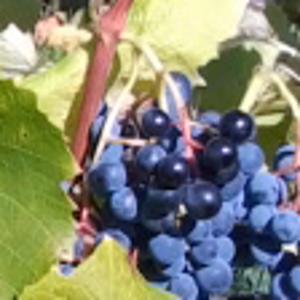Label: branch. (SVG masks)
<instances>
[{"mask_svg": "<svg viewBox=\"0 0 300 300\" xmlns=\"http://www.w3.org/2000/svg\"><path fill=\"white\" fill-rule=\"evenodd\" d=\"M134 5L135 0H120L108 7L96 23L93 63L79 106L80 118L74 140L69 145V151L77 168H82L86 163L93 118L97 113L98 104L105 100L111 52L119 40L127 15L134 9Z\"/></svg>", "mask_w": 300, "mask_h": 300, "instance_id": "obj_1", "label": "branch"}]
</instances>
